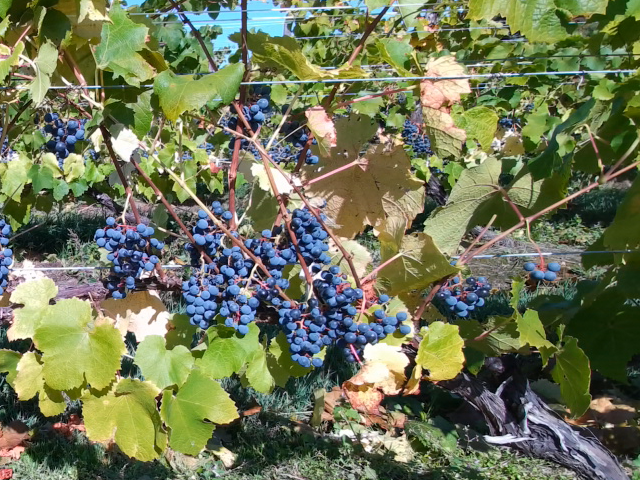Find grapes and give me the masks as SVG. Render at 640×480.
Here are the masks:
<instances>
[{"label": "grapes", "mask_w": 640, "mask_h": 480, "mask_svg": "<svg viewBox=\"0 0 640 480\" xmlns=\"http://www.w3.org/2000/svg\"><path fill=\"white\" fill-rule=\"evenodd\" d=\"M211 209L214 211L216 216H221L225 221H230L233 219V214L230 211H225L222 207V204L218 200H213L210 203Z\"/></svg>", "instance_id": "10"}, {"label": "grapes", "mask_w": 640, "mask_h": 480, "mask_svg": "<svg viewBox=\"0 0 640 480\" xmlns=\"http://www.w3.org/2000/svg\"><path fill=\"white\" fill-rule=\"evenodd\" d=\"M108 229L97 228L93 233V239L99 248H105L111 251L106 255V259L113 265L112 272L118 277H125L123 280L124 287L129 291H135L136 278L142 276V270L152 272L154 265L159 262L156 254L148 255L147 252L136 250L137 245L140 249H144L149 245L156 251L165 248V242L157 237H151L154 234L152 226H146L143 222L136 225L134 229H127L124 234L122 227L118 225L115 216H108L105 219Z\"/></svg>", "instance_id": "2"}, {"label": "grapes", "mask_w": 640, "mask_h": 480, "mask_svg": "<svg viewBox=\"0 0 640 480\" xmlns=\"http://www.w3.org/2000/svg\"><path fill=\"white\" fill-rule=\"evenodd\" d=\"M279 132L284 133L285 136H288L289 133L293 132L285 139V142H293L294 147H304L309 137L305 132V129L300 128L299 121L284 122L280 127Z\"/></svg>", "instance_id": "7"}, {"label": "grapes", "mask_w": 640, "mask_h": 480, "mask_svg": "<svg viewBox=\"0 0 640 480\" xmlns=\"http://www.w3.org/2000/svg\"><path fill=\"white\" fill-rule=\"evenodd\" d=\"M14 253L12 248H5L0 250V295L5 292V287L8 285V280L6 276L9 272V267L13 264V258L11 257Z\"/></svg>", "instance_id": "9"}, {"label": "grapes", "mask_w": 640, "mask_h": 480, "mask_svg": "<svg viewBox=\"0 0 640 480\" xmlns=\"http://www.w3.org/2000/svg\"><path fill=\"white\" fill-rule=\"evenodd\" d=\"M197 216L199 219L194 222V227L191 229L193 239L208 255H215L223 233L216 231L218 228L203 210H200Z\"/></svg>", "instance_id": "5"}, {"label": "grapes", "mask_w": 640, "mask_h": 480, "mask_svg": "<svg viewBox=\"0 0 640 480\" xmlns=\"http://www.w3.org/2000/svg\"><path fill=\"white\" fill-rule=\"evenodd\" d=\"M46 122H54L55 128L51 124H45L43 131L45 133H51L53 140L46 143V147L55 155L58 162L67 160L70 154L75 150L77 142H82L86 139V127L88 123L86 118L80 119L78 122L75 120L63 121L59 118L57 112L47 113L44 116Z\"/></svg>", "instance_id": "3"}, {"label": "grapes", "mask_w": 640, "mask_h": 480, "mask_svg": "<svg viewBox=\"0 0 640 480\" xmlns=\"http://www.w3.org/2000/svg\"><path fill=\"white\" fill-rule=\"evenodd\" d=\"M291 226L296 232L299 241L298 249L303 255L307 267L311 266L314 274L320 273V278H316L312 285L322 301L328 306L323 311L321 303L315 298H308L306 304L298 305L292 309V305L284 300L274 288L278 284L283 290L290 288V282L283 276L285 265H296L298 263L295 245L291 240L288 244L291 247L285 249L275 248L271 241L273 237L281 234L286 226L281 223L274 225L272 229H263L261 236L266 240L246 238L244 244L249 250L262 259L273 278L269 279L266 274L257 267V273L261 278L266 277L263 283L269 289H264L258 282L250 279L249 287H254L255 296L240 295L241 288L238 286L241 278L248 279L249 269L253 267V261L245 258L241 254L239 247L227 248L222 251V256H216L211 264L205 263V273L218 266L221 274H214L202 279L200 289V276L193 274L188 280L183 282V297L189 304L186 307V314L190 317L192 325H198L201 329H207L209 322L218 313L226 318L224 325L234 327L240 334L249 332L248 323L255 319L257 310L261 307V301L272 303L278 307V323L282 326V332L286 341L290 344L289 351L291 360L298 363L302 368L310 369L323 368L324 360L320 357L309 358L318 354L322 347L330 346L335 341V345L343 349V355L348 363H354L356 357L349 348L356 345V353L361 355L366 345L378 344L387 337L388 333H395L399 321H406L408 315L404 311L398 312L395 317H386L382 309L373 311L374 317L381 323H360L352 322V318L347 315H355L357 308L351 303L363 297L361 288L346 287L348 275L341 272L338 265H330L332 258L324 252L330 249L327 243H323L329 235L320 225L319 220L311 215L306 205L301 209L295 208L290 211ZM257 273L254 278L259 279ZM248 281H241L242 286H246ZM309 311L311 320H305L303 325L309 330L306 332L298 328L296 322L303 319L305 311Z\"/></svg>", "instance_id": "1"}, {"label": "grapes", "mask_w": 640, "mask_h": 480, "mask_svg": "<svg viewBox=\"0 0 640 480\" xmlns=\"http://www.w3.org/2000/svg\"><path fill=\"white\" fill-rule=\"evenodd\" d=\"M538 268L536 263H525L523 265V269L525 271L530 272L529 278L532 281H541L545 280L547 282H554L556 280L557 274L561 271V265L558 262H551L547 265L546 272L544 271H535Z\"/></svg>", "instance_id": "8"}, {"label": "grapes", "mask_w": 640, "mask_h": 480, "mask_svg": "<svg viewBox=\"0 0 640 480\" xmlns=\"http://www.w3.org/2000/svg\"><path fill=\"white\" fill-rule=\"evenodd\" d=\"M256 94H259L261 97L257 104H252L250 108L247 105L242 107L243 114L249 125L251 126V130L256 133L262 123L265 121V115L263 113H268L270 111V93L272 92V87L270 85H266L262 87H256L254 89Z\"/></svg>", "instance_id": "6"}, {"label": "grapes", "mask_w": 640, "mask_h": 480, "mask_svg": "<svg viewBox=\"0 0 640 480\" xmlns=\"http://www.w3.org/2000/svg\"><path fill=\"white\" fill-rule=\"evenodd\" d=\"M184 249L189 253V257L191 258L190 263L192 264V267L195 269H199L201 267V264L199 263L200 255L198 254L196 249L190 243H186L184 245Z\"/></svg>", "instance_id": "11"}, {"label": "grapes", "mask_w": 640, "mask_h": 480, "mask_svg": "<svg viewBox=\"0 0 640 480\" xmlns=\"http://www.w3.org/2000/svg\"><path fill=\"white\" fill-rule=\"evenodd\" d=\"M466 283L472 286H465L463 292L441 290L438 295V298L445 301L449 309L460 318H465L470 311L482 307L485 304L484 298L488 297L492 290V285L486 277H468Z\"/></svg>", "instance_id": "4"}]
</instances>
